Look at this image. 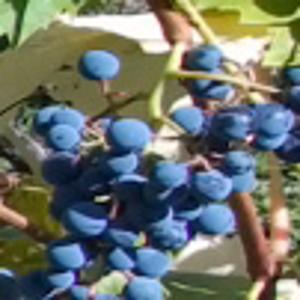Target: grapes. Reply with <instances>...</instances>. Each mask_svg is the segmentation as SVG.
Here are the masks:
<instances>
[{"label":"grapes","instance_id":"01657485","mask_svg":"<svg viewBox=\"0 0 300 300\" xmlns=\"http://www.w3.org/2000/svg\"><path fill=\"white\" fill-rule=\"evenodd\" d=\"M284 104L248 103L217 108L180 107L147 123L135 117L93 116L51 106L33 118L50 152L41 179L53 190L50 216L66 240L45 246L51 266L23 278L0 270V300H90L80 285L92 255L83 244L113 248L107 265L134 277L123 300H162L159 279L166 254L185 249L194 231L208 238L232 234L233 192L257 188L256 157L244 148L300 163V66L284 70Z\"/></svg>","mask_w":300,"mask_h":300},{"label":"grapes","instance_id":"b958b902","mask_svg":"<svg viewBox=\"0 0 300 300\" xmlns=\"http://www.w3.org/2000/svg\"><path fill=\"white\" fill-rule=\"evenodd\" d=\"M119 56L106 49H90L81 54L77 75L85 82L113 80L120 75Z\"/></svg>","mask_w":300,"mask_h":300},{"label":"grapes","instance_id":"0513c4c2","mask_svg":"<svg viewBox=\"0 0 300 300\" xmlns=\"http://www.w3.org/2000/svg\"><path fill=\"white\" fill-rule=\"evenodd\" d=\"M184 65L192 72H217L222 67L220 47L215 42L198 45L185 54Z\"/></svg>","mask_w":300,"mask_h":300},{"label":"grapes","instance_id":"84f90ec7","mask_svg":"<svg viewBox=\"0 0 300 300\" xmlns=\"http://www.w3.org/2000/svg\"><path fill=\"white\" fill-rule=\"evenodd\" d=\"M191 91L202 99L222 100L231 95L232 88L222 80H196L191 85Z\"/></svg>","mask_w":300,"mask_h":300}]
</instances>
